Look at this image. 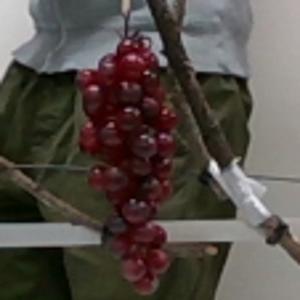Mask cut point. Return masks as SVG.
<instances>
[{
	"label": "cut point",
	"instance_id": "cut-point-1",
	"mask_svg": "<svg viewBox=\"0 0 300 300\" xmlns=\"http://www.w3.org/2000/svg\"><path fill=\"white\" fill-rule=\"evenodd\" d=\"M131 9V0H121L119 4V11L124 19V38L129 37V20L131 17Z\"/></svg>",
	"mask_w": 300,
	"mask_h": 300
}]
</instances>
